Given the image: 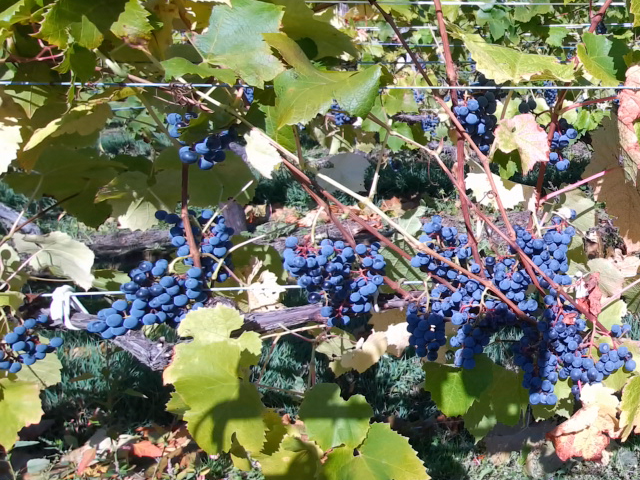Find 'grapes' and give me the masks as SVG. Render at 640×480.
<instances>
[{
	"mask_svg": "<svg viewBox=\"0 0 640 480\" xmlns=\"http://www.w3.org/2000/svg\"><path fill=\"white\" fill-rule=\"evenodd\" d=\"M419 240L423 243L426 244L427 247L429 248H433V250H435L436 252H438L439 254L443 255L445 258L453 261V256L455 253V257L457 259L460 260H465L467 257H471L472 256V249L470 246H468L466 249L464 248L465 245L468 244V237H467V233H461L459 235V242L460 244L457 246V248L453 251L451 249H446L445 251H441L440 252V248L438 246H434V244L432 243V239L429 235H422Z\"/></svg>",
	"mask_w": 640,
	"mask_h": 480,
	"instance_id": "12",
	"label": "grapes"
},
{
	"mask_svg": "<svg viewBox=\"0 0 640 480\" xmlns=\"http://www.w3.org/2000/svg\"><path fill=\"white\" fill-rule=\"evenodd\" d=\"M485 306L488 309H492L494 314H503L506 313V318L508 320H514L516 318V313L512 312L509 309V306L505 303L504 300H496L493 298H487L485 300Z\"/></svg>",
	"mask_w": 640,
	"mask_h": 480,
	"instance_id": "16",
	"label": "grapes"
},
{
	"mask_svg": "<svg viewBox=\"0 0 640 480\" xmlns=\"http://www.w3.org/2000/svg\"><path fill=\"white\" fill-rule=\"evenodd\" d=\"M565 314H575V323L566 325L562 322L564 315L557 317L556 313L547 308L543 311V316L554 324L553 327L543 332V340L550 343L552 350L543 349L540 352L537 366L540 368V375L547 377V380L541 382V389L544 392L535 391L528 397V403L533 405H550L557 403V397L553 393L554 383L558 378H570L574 381L581 380L592 386L594 383H600L604 376L609 375L624 365V369L632 372L637 368V362L633 360V353L629 351L627 346L619 347L617 350L610 349L608 342L598 345L599 352L602 354L599 360L595 362L593 358L585 357L588 352L586 347L578 351L579 345L583 344V336L578 333L586 328V320L580 319L581 313L578 312L571 304H567L563 308ZM554 352H561L560 360L564 366L559 370H555V365L559 364L557 356Z\"/></svg>",
	"mask_w": 640,
	"mask_h": 480,
	"instance_id": "3",
	"label": "grapes"
},
{
	"mask_svg": "<svg viewBox=\"0 0 640 480\" xmlns=\"http://www.w3.org/2000/svg\"><path fill=\"white\" fill-rule=\"evenodd\" d=\"M484 262L487 266H492L493 269V275H490L489 271L484 269V277L491 279V283L498 290H507L506 296L517 302V306L521 311L534 312L538 308V303L535 299H525V291L529 289V285L533 284L526 269L514 270L513 274L505 272L507 266L511 267L516 264L515 258H504L502 262L495 263L494 256H485Z\"/></svg>",
	"mask_w": 640,
	"mask_h": 480,
	"instance_id": "7",
	"label": "grapes"
},
{
	"mask_svg": "<svg viewBox=\"0 0 640 480\" xmlns=\"http://www.w3.org/2000/svg\"><path fill=\"white\" fill-rule=\"evenodd\" d=\"M334 307L332 305H325L320 312L322 317L327 318V322L325 325L327 327H335L337 325L338 319L336 316H333Z\"/></svg>",
	"mask_w": 640,
	"mask_h": 480,
	"instance_id": "20",
	"label": "grapes"
},
{
	"mask_svg": "<svg viewBox=\"0 0 640 480\" xmlns=\"http://www.w3.org/2000/svg\"><path fill=\"white\" fill-rule=\"evenodd\" d=\"M410 265L413 268H420L423 265H426V270L434 271V275L436 276L442 277L445 275L448 279H455L457 283H466L465 287L456 289L454 293L448 289L445 284H438L435 289L430 290L431 297H439L442 293L450 296L444 298L441 302L433 300L431 302V314L445 319V313L450 312V322L452 325L460 326L463 324L461 328L456 331V336H451L449 338V345L451 347H460L461 344L464 343L466 335L473 331V326L470 323H466L467 320L470 322L475 321V313L469 312L471 307L467 305L480 304L479 301L481 299L484 286L474 278H468L464 274H458V271L455 269L449 270V265L443 263L437 258H433L431 255H426L424 251H419L418 254L411 259ZM456 303H459L460 308L467 306L463 309V313H459L457 310H452V308L456 306Z\"/></svg>",
	"mask_w": 640,
	"mask_h": 480,
	"instance_id": "4",
	"label": "grapes"
},
{
	"mask_svg": "<svg viewBox=\"0 0 640 480\" xmlns=\"http://www.w3.org/2000/svg\"><path fill=\"white\" fill-rule=\"evenodd\" d=\"M463 352H464L463 348H459V349H456L454 351V356L455 357L453 359V362H454V366L455 367H461L464 364V358H463L464 357V353Z\"/></svg>",
	"mask_w": 640,
	"mask_h": 480,
	"instance_id": "23",
	"label": "grapes"
},
{
	"mask_svg": "<svg viewBox=\"0 0 640 480\" xmlns=\"http://www.w3.org/2000/svg\"><path fill=\"white\" fill-rule=\"evenodd\" d=\"M166 118V122L169 125H173L169 130H168V134L172 137V138H179L181 136V134H179L177 132V129L179 127H187V125L183 122L184 121V117L181 114H178L177 112H172V113H167L165 115Z\"/></svg>",
	"mask_w": 640,
	"mask_h": 480,
	"instance_id": "17",
	"label": "grapes"
},
{
	"mask_svg": "<svg viewBox=\"0 0 640 480\" xmlns=\"http://www.w3.org/2000/svg\"><path fill=\"white\" fill-rule=\"evenodd\" d=\"M481 107H485L488 114H493L496 111L495 94L492 91H486L477 99L470 98L466 107L457 106L453 109V113L463 125L464 130L470 133V138L477 143L481 151H487L493 141V132L489 128L496 124L497 117L488 115L480 118L474 112L479 111Z\"/></svg>",
	"mask_w": 640,
	"mask_h": 480,
	"instance_id": "6",
	"label": "grapes"
},
{
	"mask_svg": "<svg viewBox=\"0 0 640 480\" xmlns=\"http://www.w3.org/2000/svg\"><path fill=\"white\" fill-rule=\"evenodd\" d=\"M47 321L48 317L44 313L39 314L35 318L25 319L21 325H16L12 329V333H7L4 337V343L11 346L15 352L26 351L18 356L19 361L25 366L34 365L37 359H44L47 353H53L57 347H61L64 344L62 337H52L49 345L45 343L37 345L32 341L30 335L26 337L23 336L28 329H32L36 325L46 323Z\"/></svg>",
	"mask_w": 640,
	"mask_h": 480,
	"instance_id": "8",
	"label": "grapes"
},
{
	"mask_svg": "<svg viewBox=\"0 0 640 480\" xmlns=\"http://www.w3.org/2000/svg\"><path fill=\"white\" fill-rule=\"evenodd\" d=\"M222 141L216 136H208L196 143L191 149L183 146L179 149V159L186 164H195L198 160V167L202 170H211L216 163H222L226 158V153L219 150Z\"/></svg>",
	"mask_w": 640,
	"mask_h": 480,
	"instance_id": "10",
	"label": "grapes"
},
{
	"mask_svg": "<svg viewBox=\"0 0 640 480\" xmlns=\"http://www.w3.org/2000/svg\"><path fill=\"white\" fill-rule=\"evenodd\" d=\"M536 279L538 280L539 284L543 289L549 290V294H546L545 296H543V303L545 305L557 306L558 291L555 290L553 286L550 285L541 275H537Z\"/></svg>",
	"mask_w": 640,
	"mask_h": 480,
	"instance_id": "18",
	"label": "grapes"
},
{
	"mask_svg": "<svg viewBox=\"0 0 640 480\" xmlns=\"http://www.w3.org/2000/svg\"><path fill=\"white\" fill-rule=\"evenodd\" d=\"M4 358V352L0 350V369H8L10 374L18 373L22 369L20 363L10 362L9 360H2Z\"/></svg>",
	"mask_w": 640,
	"mask_h": 480,
	"instance_id": "21",
	"label": "grapes"
},
{
	"mask_svg": "<svg viewBox=\"0 0 640 480\" xmlns=\"http://www.w3.org/2000/svg\"><path fill=\"white\" fill-rule=\"evenodd\" d=\"M632 326L630 324H624L622 327L616 324L611 325V333L613 336L620 337L622 333H630Z\"/></svg>",
	"mask_w": 640,
	"mask_h": 480,
	"instance_id": "22",
	"label": "grapes"
},
{
	"mask_svg": "<svg viewBox=\"0 0 640 480\" xmlns=\"http://www.w3.org/2000/svg\"><path fill=\"white\" fill-rule=\"evenodd\" d=\"M201 267H191L187 271V278L178 279L166 275L153 283L150 287H141L146 281L147 274L162 276L168 268L166 259L140 262L137 268L129 271L131 282L119 286V292L124 300H114L110 308H103L97 312L96 321L87 326L89 333L98 332L102 339L124 336L128 330L141 325L162 324L169 317L175 323L182 322L188 313L186 304L196 300L191 309L202 308L208 300V295L199 286L210 280L218 267V262L212 257H202Z\"/></svg>",
	"mask_w": 640,
	"mask_h": 480,
	"instance_id": "1",
	"label": "grapes"
},
{
	"mask_svg": "<svg viewBox=\"0 0 640 480\" xmlns=\"http://www.w3.org/2000/svg\"><path fill=\"white\" fill-rule=\"evenodd\" d=\"M214 225L210 228L211 235L213 237L203 239L201 241L200 250L203 253L211 254L215 258H222L226 255L223 261V265L227 268L222 269L216 278L218 283H224L229 277V272L235 270L234 263L231 261L234 258L232 253L227 254V250L233 247V243L229 240L235 233V229L232 226H228L225 223V217L222 214H218L214 219Z\"/></svg>",
	"mask_w": 640,
	"mask_h": 480,
	"instance_id": "9",
	"label": "grapes"
},
{
	"mask_svg": "<svg viewBox=\"0 0 640 480\" xmlns=\"http://www.w3.org/2000/svg\"><path fill=\"white\" fill-rule=\"evenodd\" d=\"M418 311H420L421 313H425L426 307L417 306L415 302L407 303V310L405 312V316H406L405 323L407 325L415 326L417 323L425 319V315L424 314L419 315Z\"/></svg>",
	"mask_w": 640,
	"mask_h": 480,
	"instance_id": "15",
	"label": "grapes"
},
{
	"mask_svg": "<svg viewBox=\"0 0 640 480\" xmlns=\"http://www.w3.org/2000/svg\"><path fill=\"white\" fill-rule=\"evenodd\" d=\"M155 218L159 221H166L169 224L176 223L170 232L169 237L171 238V245L174 248H178L176 251V256H183L190 252L189 245L187 244V238L184 236V225L183 220L177 214H168L163 209H158L155 212Z\"/></svg>",
	"mask_w": 640,
	"mask_h": 480,
	"instance_id": "11",
	"label": "grapes"
},
{
	"mask_svg": "<svg viewBox=\"0 0 640 480\" xmlns=\"http://www.w3.org/2000/svg\"><path fill=\"white\" fill-rule=\"evenodd\" d=\"M442 216L433 215L431 217V223L424 222L422 231L424 233H439L440 238L445 242L455 243L458 238L459 229L456 226L442 227Z\"/></svg>",
	"mask_w": 640,
	"mask_h": 480,
	"instance_id": "13",
	"label": "grapes"
},
{
	"mask_svg": "<svg viewBox=\"0 0 640 480\" xmlns=\"http://www.w3.org/2000/svg\"><path fill=\"white\" fill-rule=\"evenodd\" d=\"M515 234H517V246L523 249L532 262L542 269L550 279L560 285H571L572 277L568 274H555L554 271L567 273L569 271L568 264V245L572 243V236L575 235L576 229L568 225L563 231L558 229L547 228L542 233V239H533L532 233L526 231L524 226L511 225Z\"/></svg>",
	"mask_w": 640,
	"mask_h": 480,
	"instance_id": "5",
	"label": "grapes"
},
{
	"mask_svg": "<svg viewBox=\"0 0 640 480\" xmlns=\"http://www.w3.org/2000/svg\"><path fill=\"white\" fill-rule=\"evenodd\" d=\"M285 246L281 259L283 269L289 271L291 276L298 278L297 284L309 292L307 294L309 304H316L321 300V295L313 292L314 290L333 293L335 301L348 300L349 304L340 309L343 315L339 320L343 327H347L350 323L348 312L363 313L372 308V304L368 302L369 294L374 295L378 285L385 283L384 277L375 271L380 272L387 266L385 257L378 252L380 248L378 241H372L370 245L358 243L352 247L344 240L325 238L319 241L318 254L307 250L305 256H300V252L295 250L298 246L296 236H287ZM366 252H370V256L362 259V266L373 269L358 279H351L349 274L353 258Z\"/></svg>",
	"mask_w": 640,
	"mask_h": 480,
	"instance_id": "2",
	"label": "grapes"
},
{
	"mask_svg": "<svg viewBox=\"0 0 640 480\" xmlns=\"http://www.w3.org/2000/svg\"><path fill=\"white\" fill-rule=\"evenodd\" d=\"M548 160V164L550 166L555 164L559 172L566 171L570 166V161L568 159L559 160V155L556 152H550L548 154Z\"/></svg>",
	"mask_w": 640,
	"mask_h": 480,
	"instance_id": "19",
	"label": "grapes"
},
{
	"mask_svg": "<svg viewBox=\"0 0 640 480\" xmlns=\"http://www.w3.org/2000/svg\"><path fill=\"white\" fill-rule=\"evenodd\" d=\"M578 137V130L576 128H569L563 134L560 131H555L553 138L554 141L549 143V149L554 151L555 149L561 150L570 144V139H576Z\"/></svg>",
	"mask_w": 640,
	"mask_h": 480,
	"instance_id": "14",
	"label": "grapes"
}]
</instances>
